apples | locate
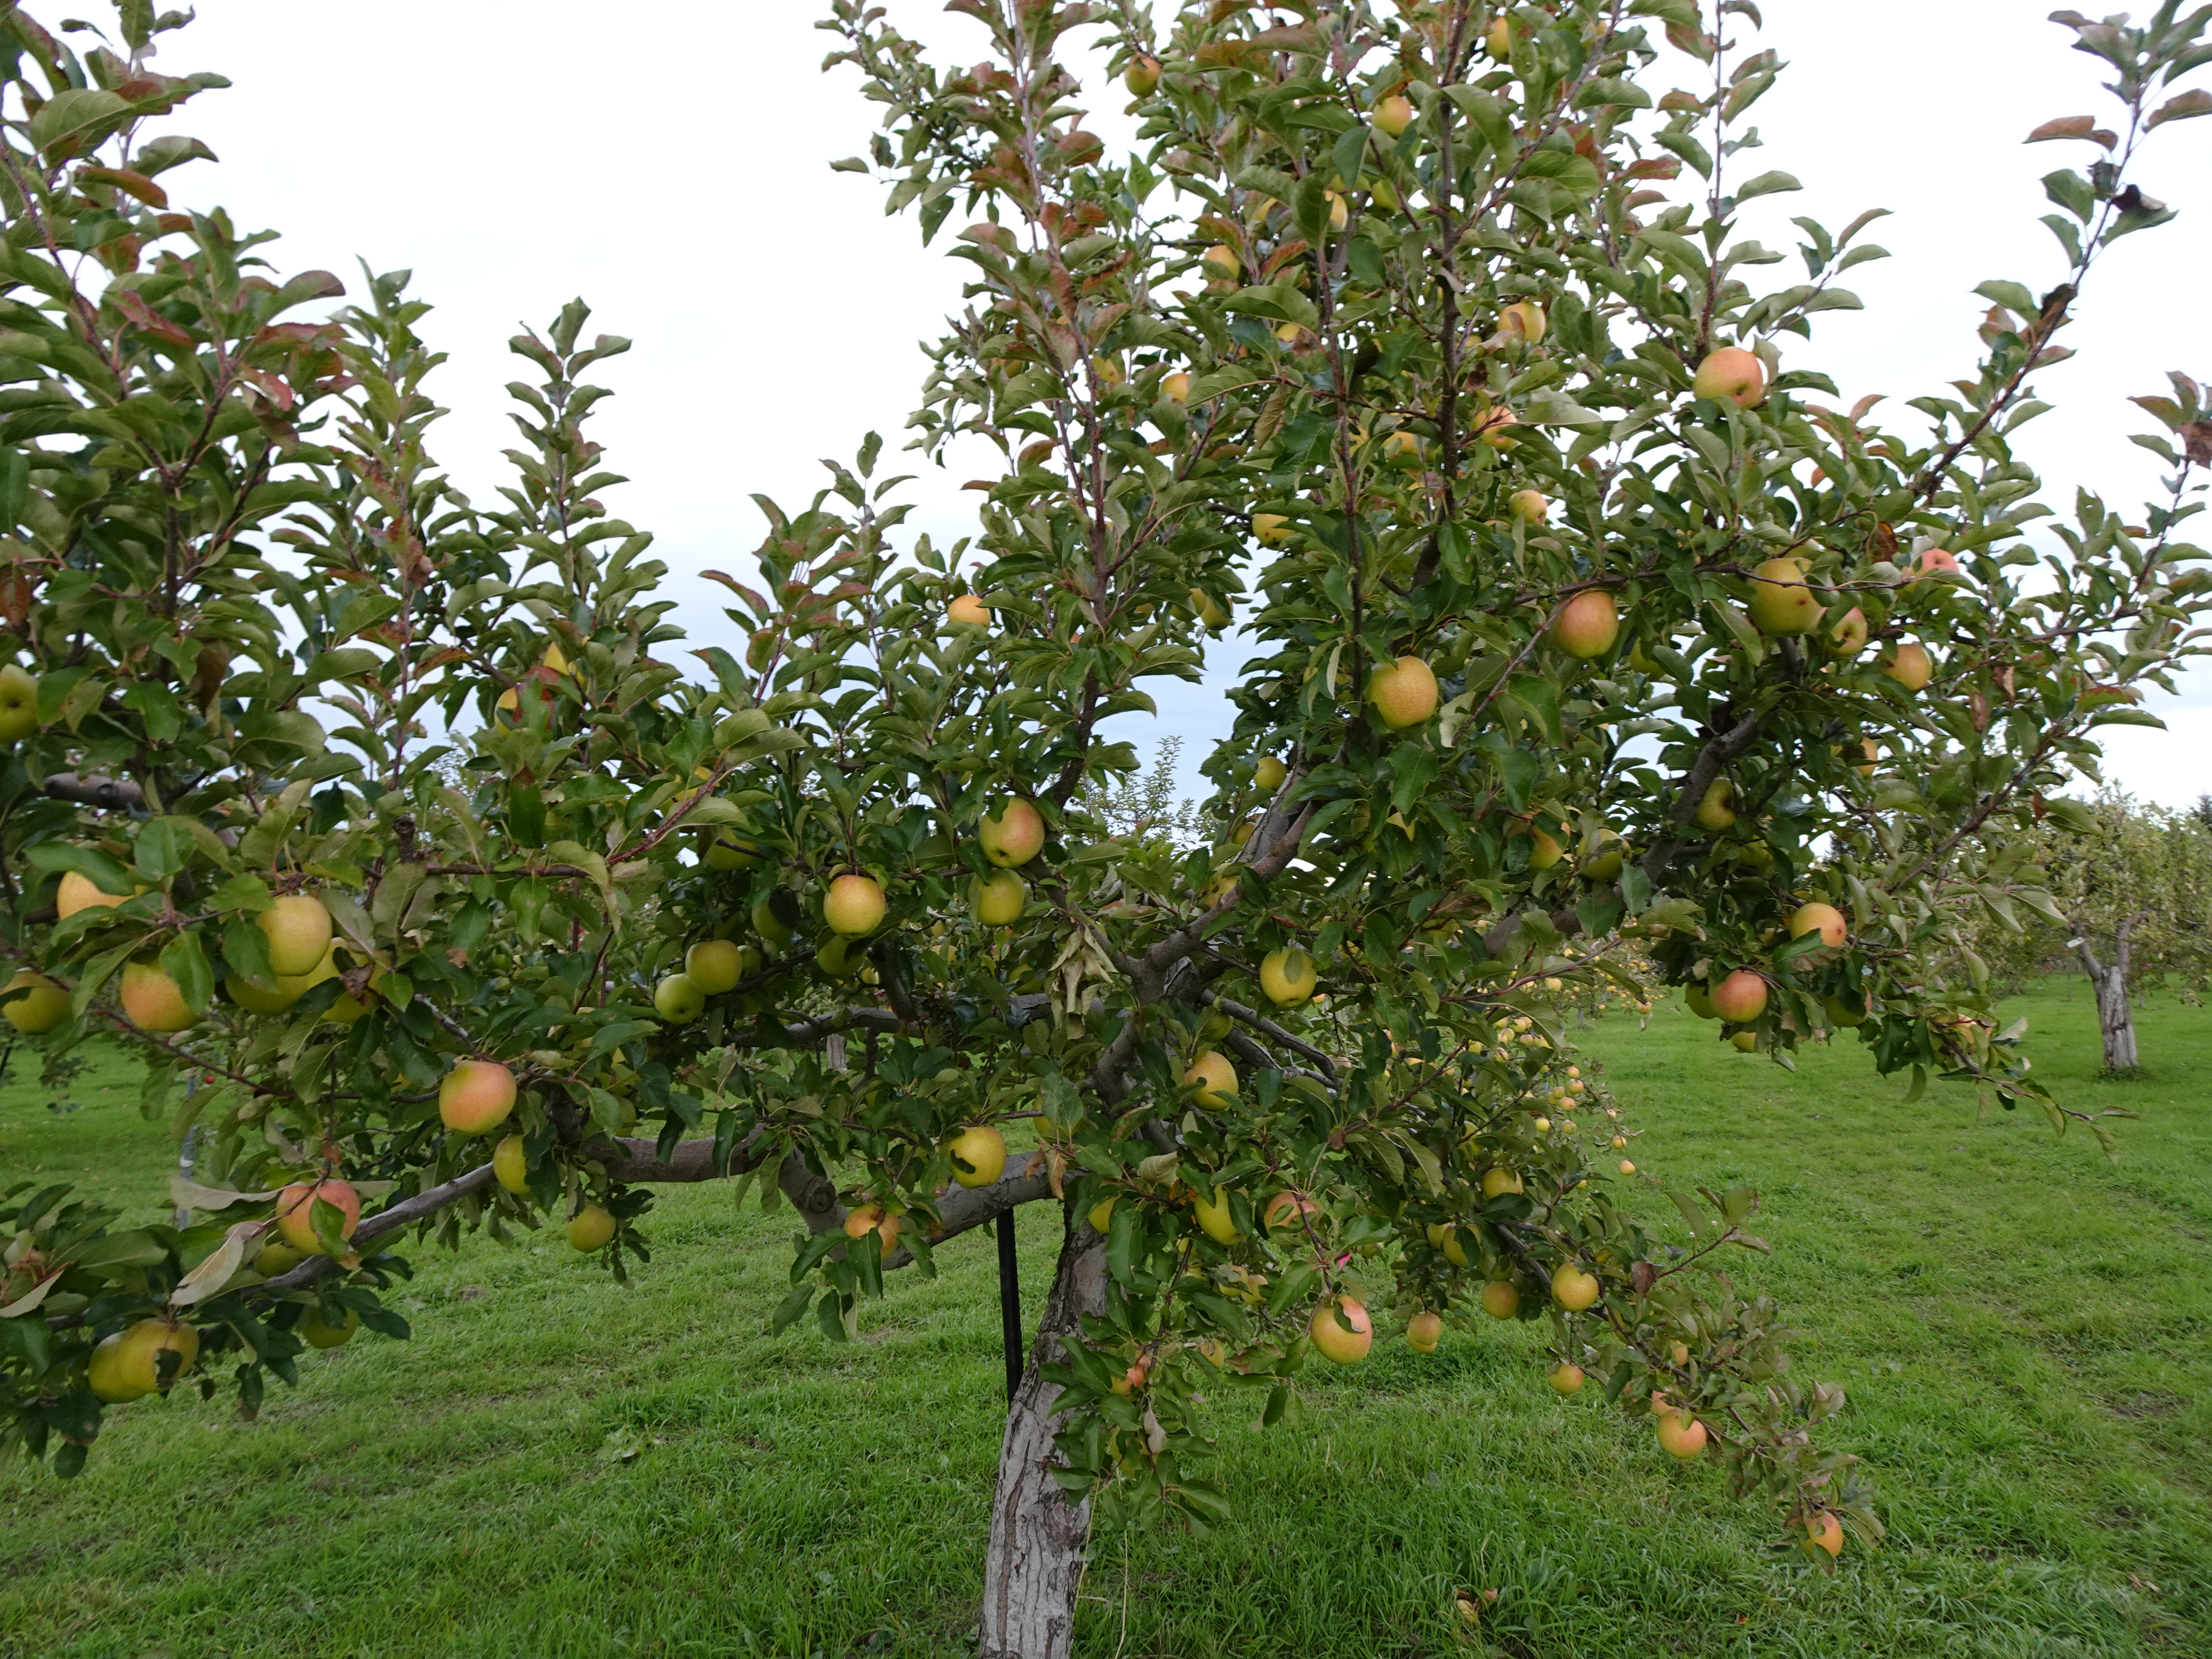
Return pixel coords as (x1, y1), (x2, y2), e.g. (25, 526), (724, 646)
(1426, 1210), (1467, 1254)
(944, 1121), (1008, 1192)
(1786, 900), (1847, 959)
(415, 847), (448, 872)
(1201, 244), (1241, 286)
(1507, 489), (1549, 529)
(1252, 756), (1287, 795)
(0, 662), (50, 744)
(1006, 960), (1048, 997)
(1551, 1258), (1602, 1313)
(87, 1329), (150, 1407)
(1441, 1086), (1473, 1111)
(1346, 424), (1375, 464)
(98, 815), (148, 861)
(1375, 181), (1407, 215)
(304, 934), (394, 1024)
(1490, 1045), (1506, 1063)
(1125, 907), (1162, 938)
(1545, 591), (1619, 661)
(542, 637), (613, 698)
(842, 1203), (902, 1264)
(1357, 653), (1439, 733)
(1018, 880), (1050, 919)
(1086, 349), (1134, 406)
(1169, 581), (1207, 621)
(1240, 1273), (1271, 1305)
(556, 1005), (618, 1052)
(1680, 774), (1748, 834)
(1408, 1310), (1443, 1345)
(1400, 1056), (1438, 1087)
(1729, 1019), (1769, 1053)
(2021, 648), (2053, 679)
(1621, 1377), (1657, 1414)
(1193, 1171), (1256, 1247)
(1175, 1228), (1211, 1264)
(1310, 987), (1329, 1006)
(1577, 827), (1633, 884)
(438, 1058), (518, 1135)
(1459, 334), (1486, 361)
(1321, 1055), (1354, 1084)
(1212, 331), (1250, 375)
(1764, 922), (1793, 954)
(1198, 876), (1249, 918)
(1546, 803), (1589, 852)
(1103, 1341), (1152, 1405)
(1260, 942), (1317, 1007)
(2, 971), (79, 1038)
(686, 937), (744, 993)
(1479, 520), (1510, 550)
(1097, 899), (1132, 928)
(1276, 268), (1310, 298)
(492, 1129), (563, 1195)
(1055, 312), (1089, 346)
(1810, 600), (1868, 657)
(56, 855), (165, 948)
(1657, 1409), (1708, 1456)
(1839, 983), (1874, 1022)
(1311, 1294), (1373, 1363)
(860, 963), (890, 997)
(1263, 1187), (1322, 1246)
(1497, 303), (1549, 353)
(1785, 1509), (1844, 1566)
(1335, 935), (1361, 961)
(1088, 521), (1121, 554)
(1124, 55), (1162, 99)
(1482, 1166), (1523, 1207)
(1931, 1011), (1986, 1056)
(588, 1094), (637, 1141)
(698, 808), (776, 872)
(1437, 1064), (1456, 1087)
(1379, 412), (1431, 466)
(925, 943), (966, 983)
(672, 756), (723, 812)
(1576, 1178), (1590, 1190)
(1518, 1140), (1541, 1161)
(114, 1315), (200, 1393)
(1656, 1331), (1690, 1367)
(1826, 733), (1879, 780)
(94, 229), (142, 269)
(1443, 1222), (1486, 1269)
(1899, 548), (1960, 612)
(1707, 966), (1770, 1023)
(480, 773), (512, 801)
(1875, 643), (1934, 691)
(1649, 1386), (1686, 1419)
(655, 973), (706, 1026)
(1455, 466), (1477, 488)
(988, 345), (1027, 386)
(816, 920), (869, 978)
(1485, 15), (1533, 65)
(224, 928), (306, 1018)
(1744, 557), (1834, 637)
(1670, 529), (1707, 568)
(1693, 344), (1764, 415)
(301, 1292), (359, 1352)
(1044, 624), (1087, 667)
(1250, 497), (1298, 549)
(1185, 1262), (1213, 1295)
(1199, 594), (1233, 631)
(843, 976), (883, 1012)
(1483, 1277), (1522, 1319)
(120, 942), (210, 1035)
(217, 802), (248, 828)
(751, 878), (823, 947)
(1084, 1178), (1137, 1235)
(1370, 95), (1415, 144)
(1608, 1298), (1658, 1346)
(1501, 800), (1572, 871)
(1476, 917), (1497, 938)
(1684, 969), (1729, 1020)
(493, 680), (573, 751)
(1447, 1121), (1485, 1165)
(275, 1175), (360, 1258)
(990, 143), (1028, 172)
(1462, 1039), (1481, 1054)
(1032, 1087), (1094, 1146)
(945, 593), (992, 638)
(1191, 1337), (1227, 1376)
(1762, 532), (1826, 574)
(1156, 371), (1208, 421)
(377, 1066), (426, 1114)
(255, 893), (333, 977)
(1178, 1053), (1240, 1111)
(886, 914), (908, 938)
(547, 1022), (586, 1058)
(975, 793), (1045, 868)
(1798, 664), (1833, 699)
(1541, 852), (1576, 892)
(1215, 1263), (1250, 1296)
(822, 873), (887, 938)
(1420, 281), (1453, 305)
(1119, 589), (1158, 628)
(1270, 320), (1320, 376)
(204, 1074), (217, 1085)
(731, 942), (765, 982)
(929, 918), (947, 937)
(1629, 630), (1673, 677)
(1356, 1227), (1384, 1259)
(1308, 189), (1349, 239)
(1376, 1026), (1405, 1060)
(1721, 813), (1786, 874)
(1405, 1325), (1440, 1356)
(568, 1198), (619, 1255)
(1406, 480), (1439, 509)
(1545, 1357), (1584, 1395)
(966, 862), (1024, 927)
(1321, 912), (1337, 928)
(602, 1033), (641, 1061)
(1566, 891), (1590, 916)
(1468, 405), (1522, 455)
(1230, 819), (1268, 854)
